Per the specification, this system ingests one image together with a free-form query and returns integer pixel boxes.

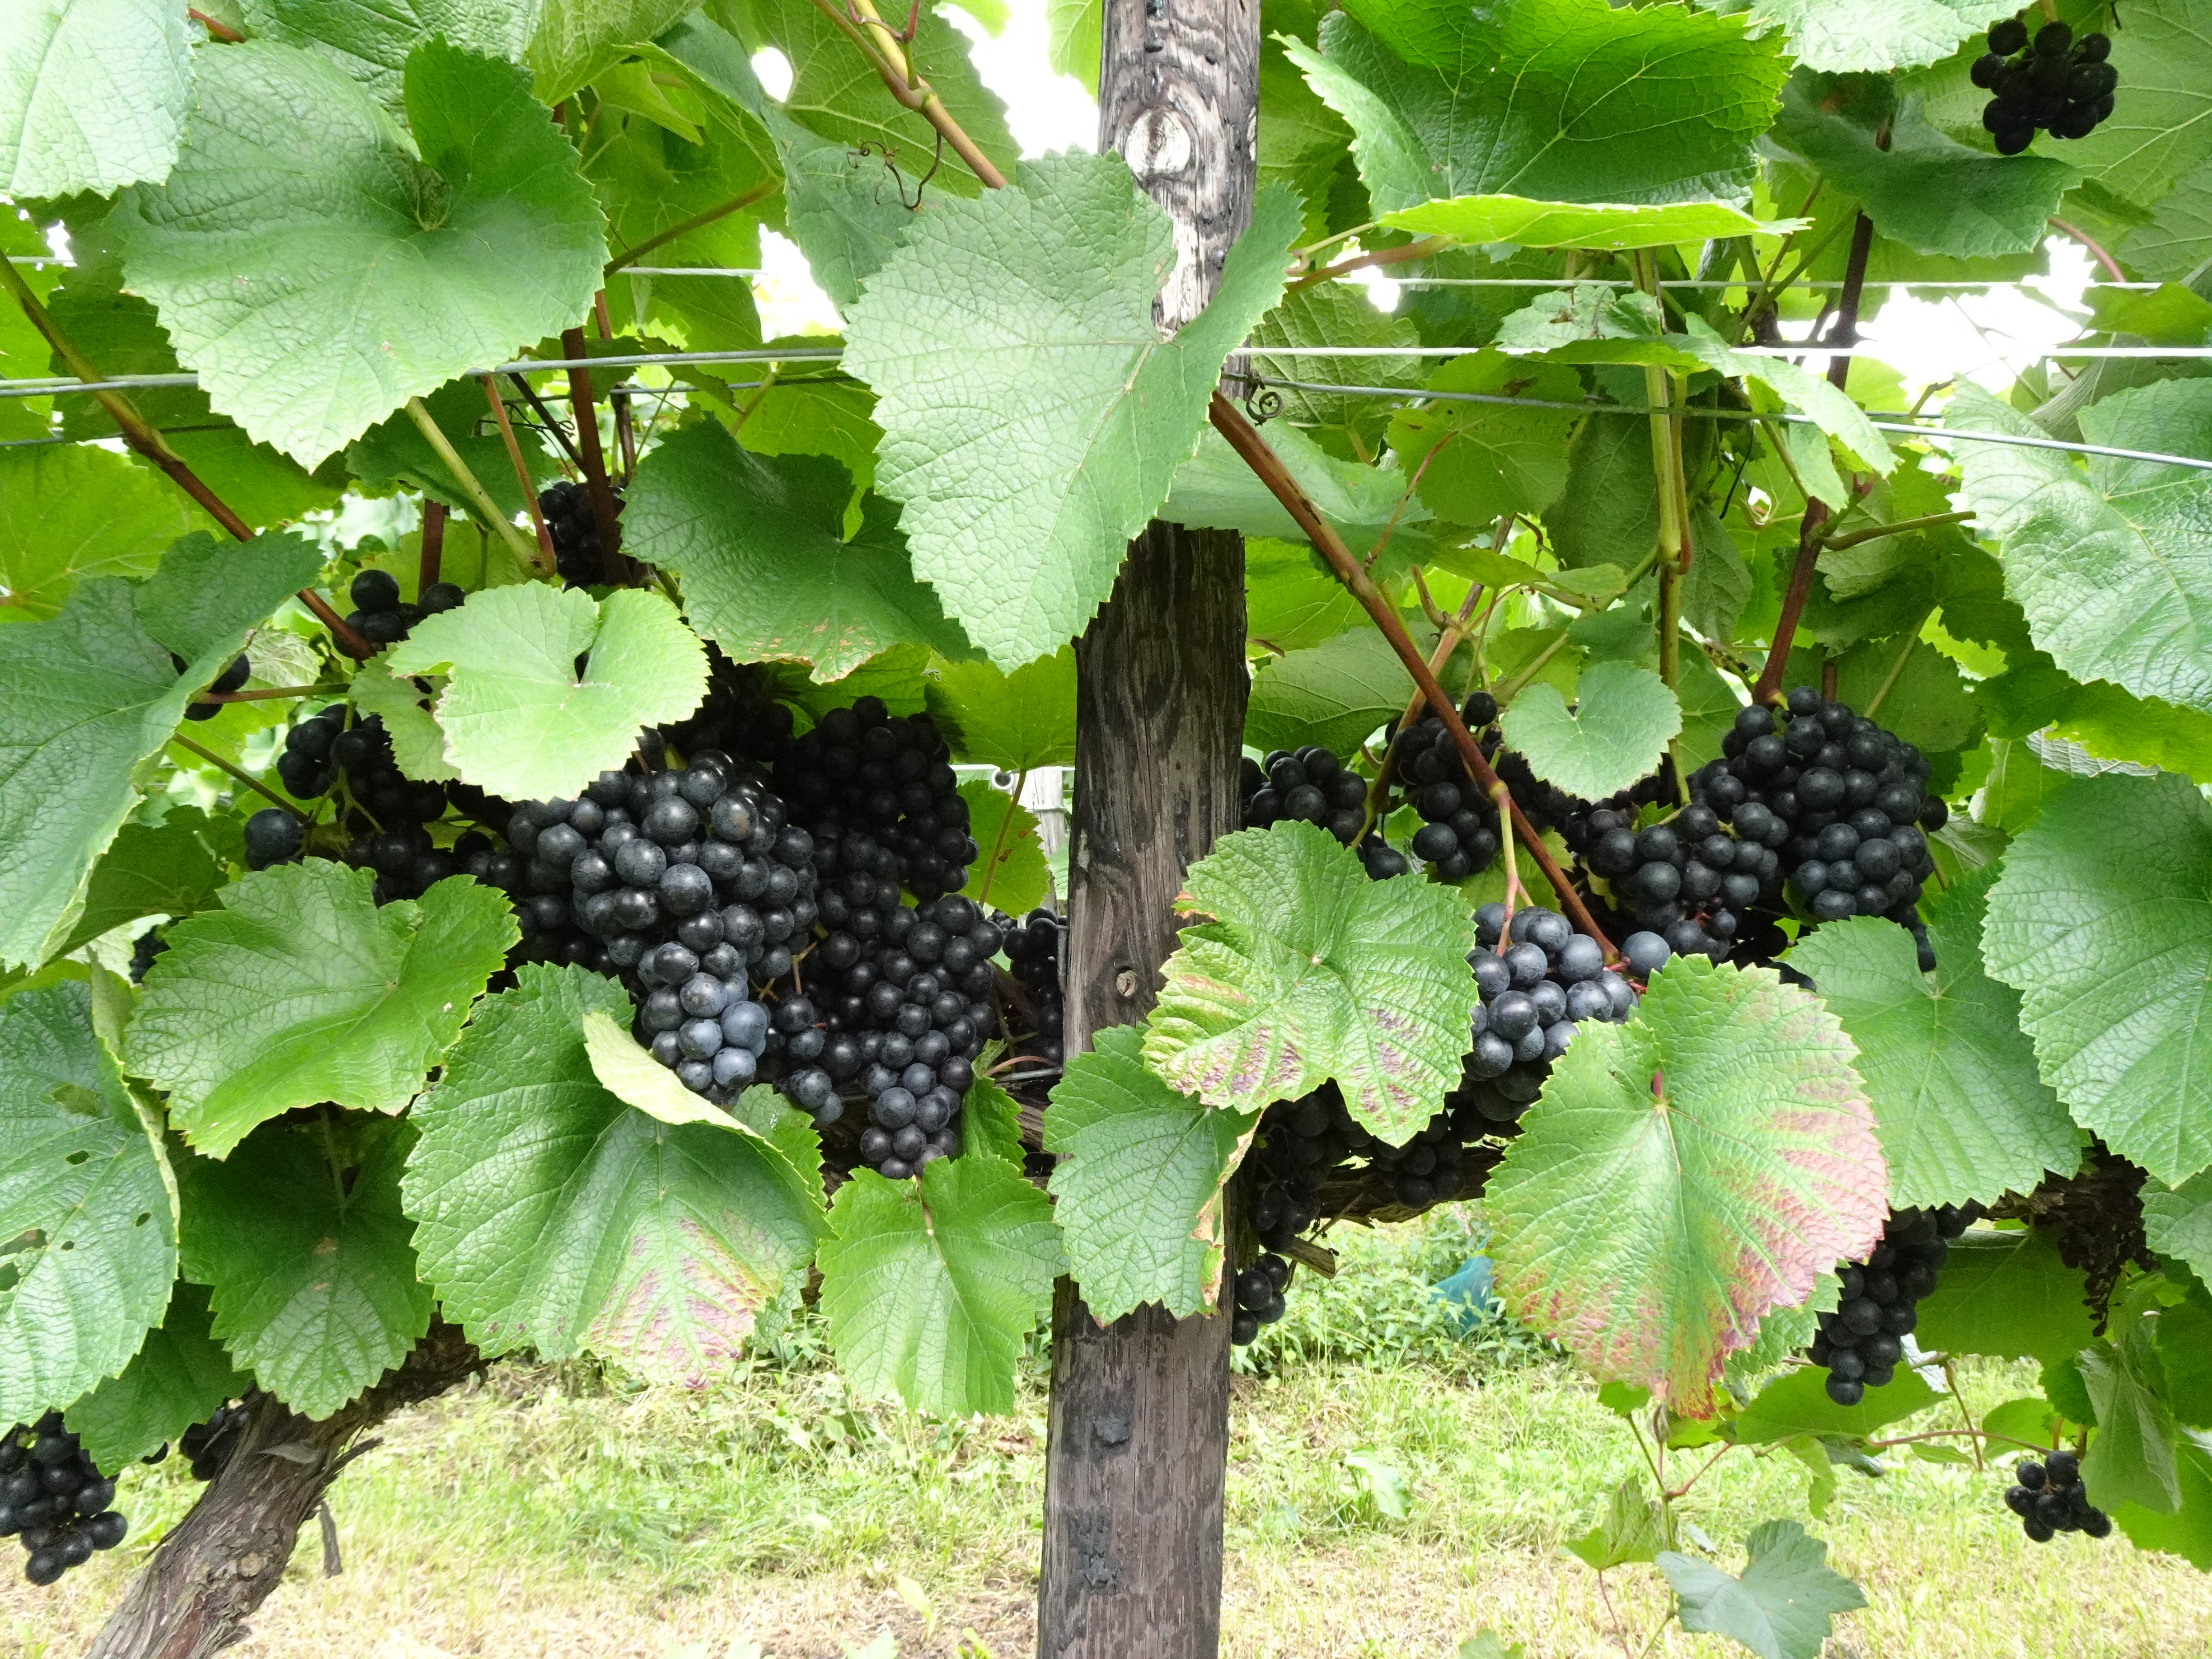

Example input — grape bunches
[2005,1450,2112,1542]
[1262,1078,1372,1188]
[0,1407,127,1585]
[755,977,864,1125]
[178,1408,250,1480]
[662,1464,767,1543]
[1352,1099,1487,1208]
[277,704,448,835]
[854,894,1003,1180]
[1699,686,1948,972]
[658,639,793,766]
[1722,908,1795,968]
[169,653,249,721]
[1382,692,1551,879]
[1232,1182,1327,1345]
[537,476,649,594]
[1971,18,2119,156]
[809,821,902,1025]
[1240,746,1408,881]
[344,569,465,669]
[244,809,463,910]
[1444,902,1671,1136]
[1002,908,1069,1104]
[509,726,818,1099]
[1765,961,1817,992]
[141,1441,168,1465]
[775,697,978,903]
[452,830,622,985]
[1533,752,1676,815]
[1804,1198,1978,1406]
[1566,771,1788,963]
